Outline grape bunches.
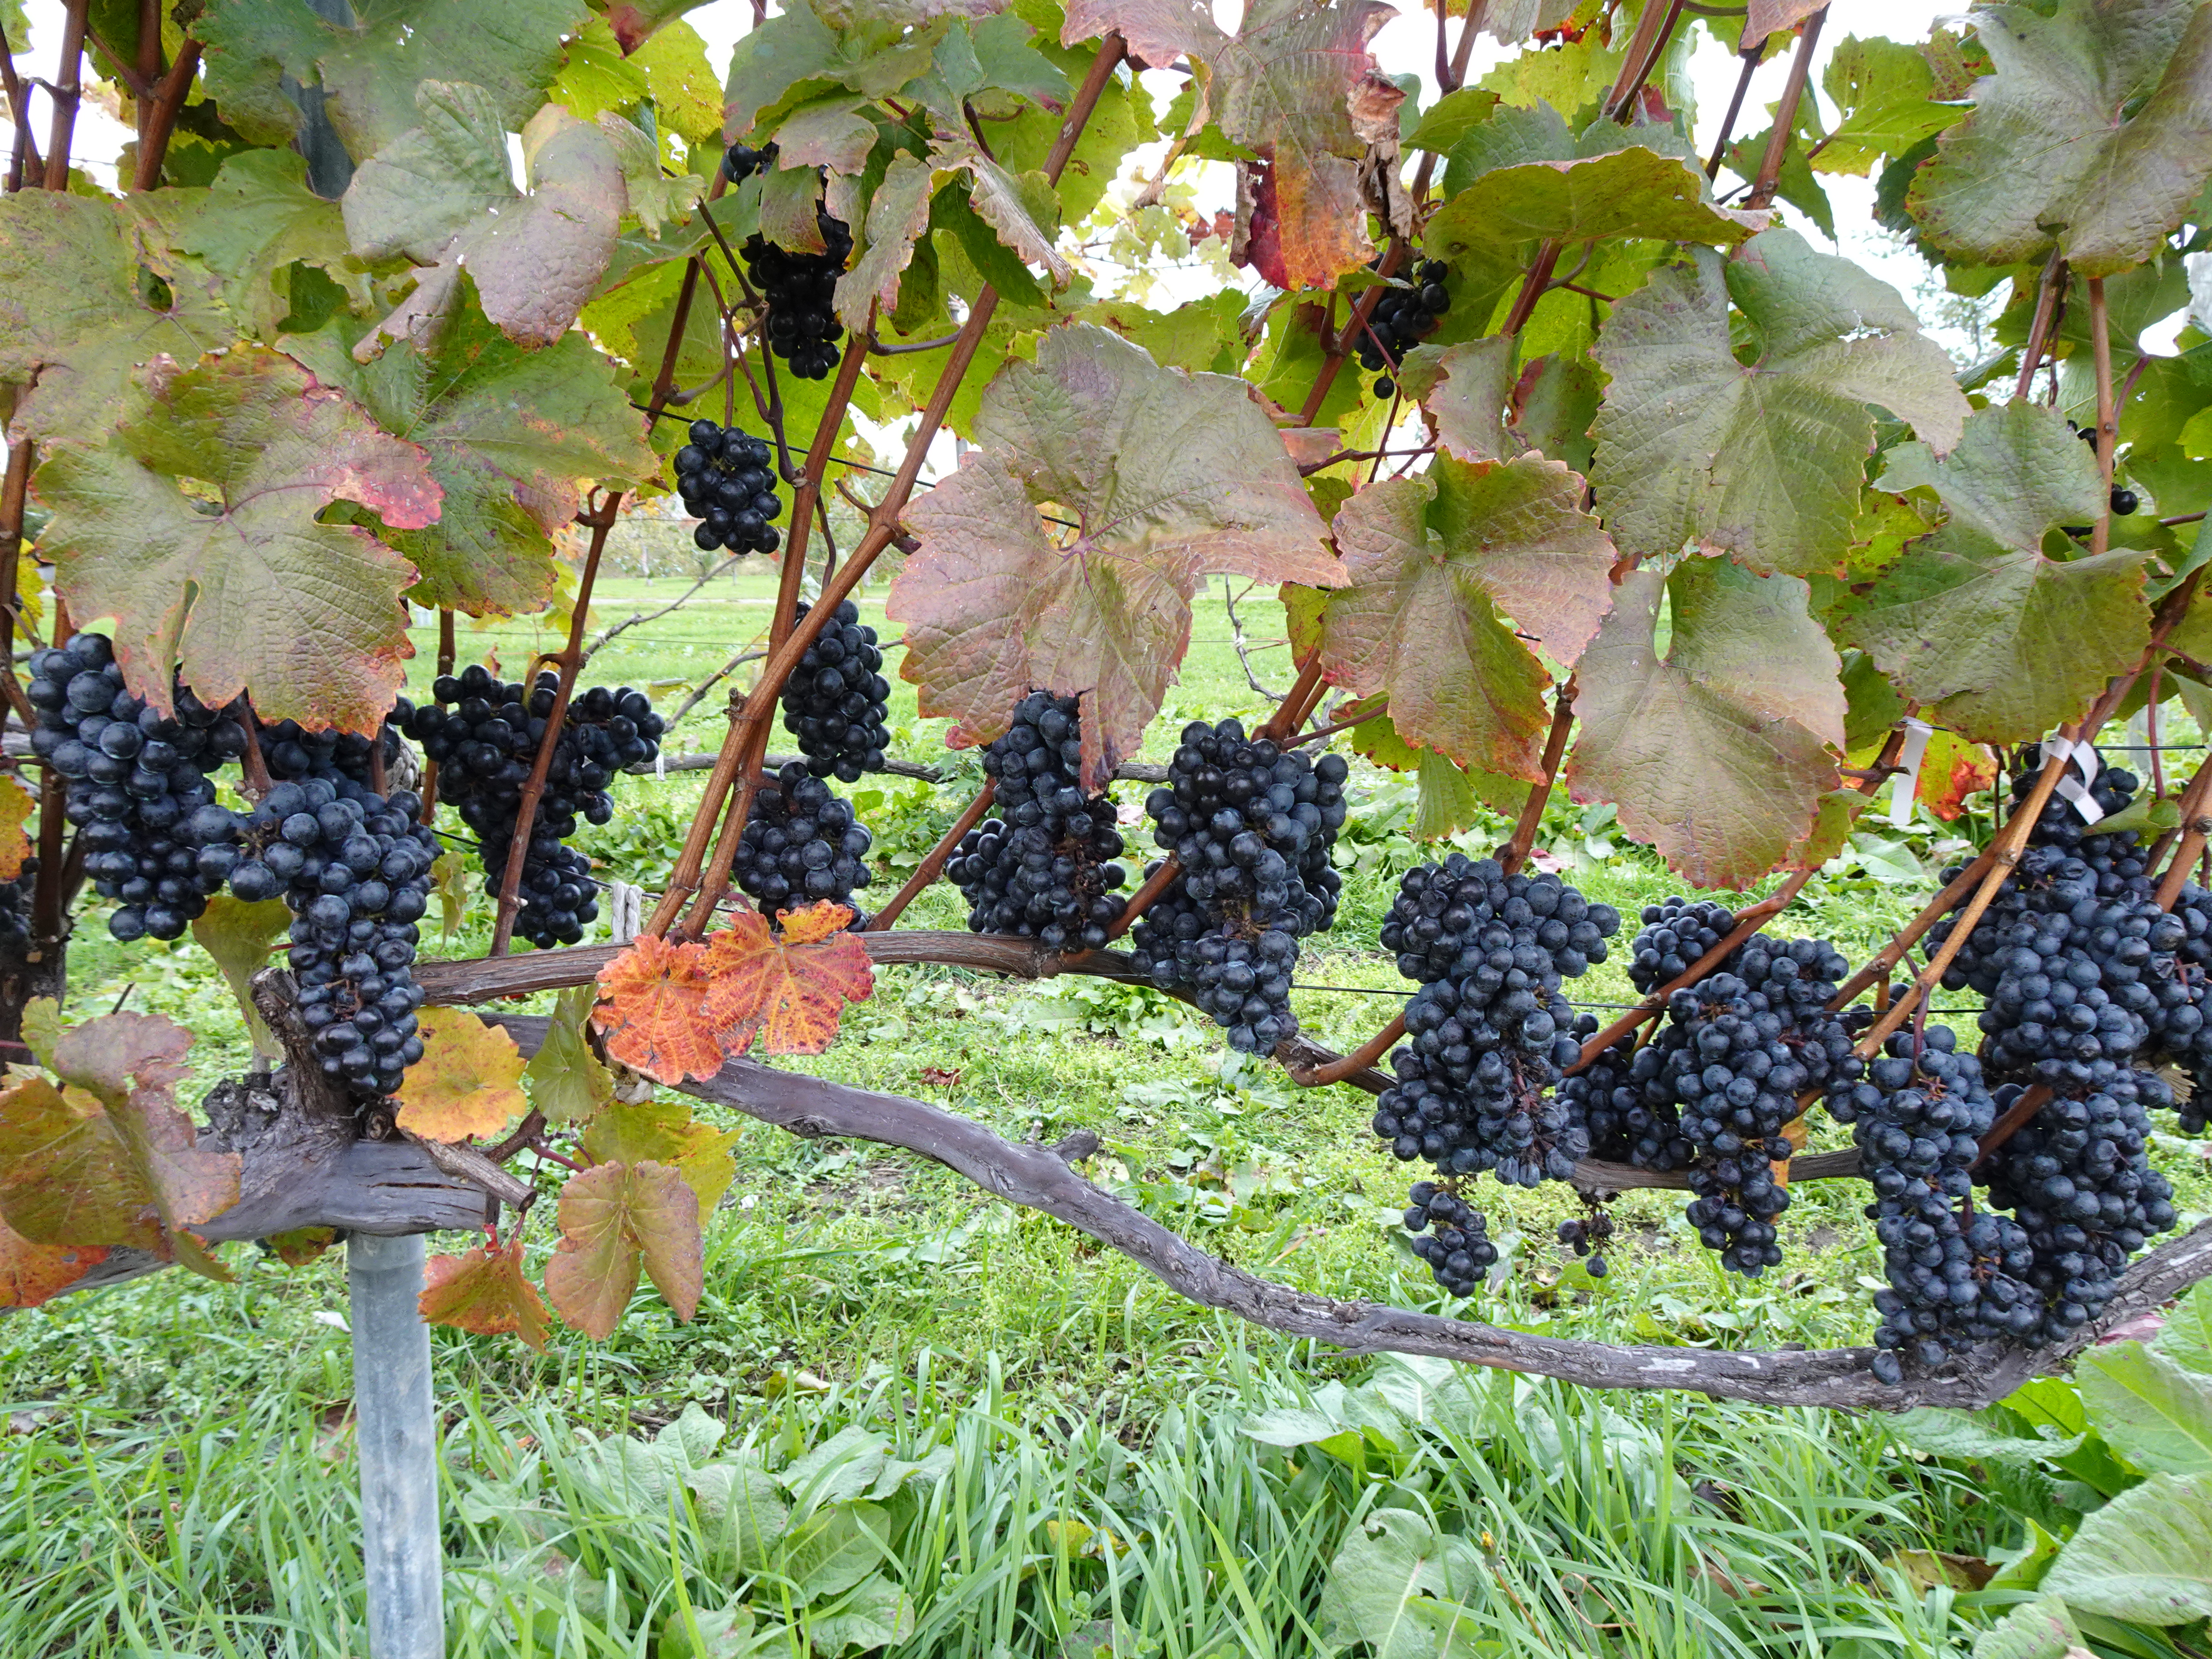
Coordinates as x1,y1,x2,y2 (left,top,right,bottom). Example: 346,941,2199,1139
1923,853,2002,996
1820,985,1993,1308
1943,1217,2039,1339
1566,1013,1689,1171
1980,844,2184,1085
673,419,781,555
1734,932,1864,1095
1469,1008,1591,1187
1372,854,1619,1160
227,779,444,1094
1144,719,1348,1060
1404,1146,1501,1298
1627,896,1735,996
1871,1287,1971,1385
1557,1214,1614,1277
2136,867,2211,1132
1967,1079,2177,1351
1128,855,1213,990
0,830,44,984
28,632,250,943
982,692,1128,955
779,601,890,783
2005,740,2151,896
729,761,873,934
235,688,417,798
946,818,1007,933
1352,252,1451,399
402,665,665,949
720,141,854,381
2059,419,2136,537
1662,971,1809,1278
1296,828,1339,932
